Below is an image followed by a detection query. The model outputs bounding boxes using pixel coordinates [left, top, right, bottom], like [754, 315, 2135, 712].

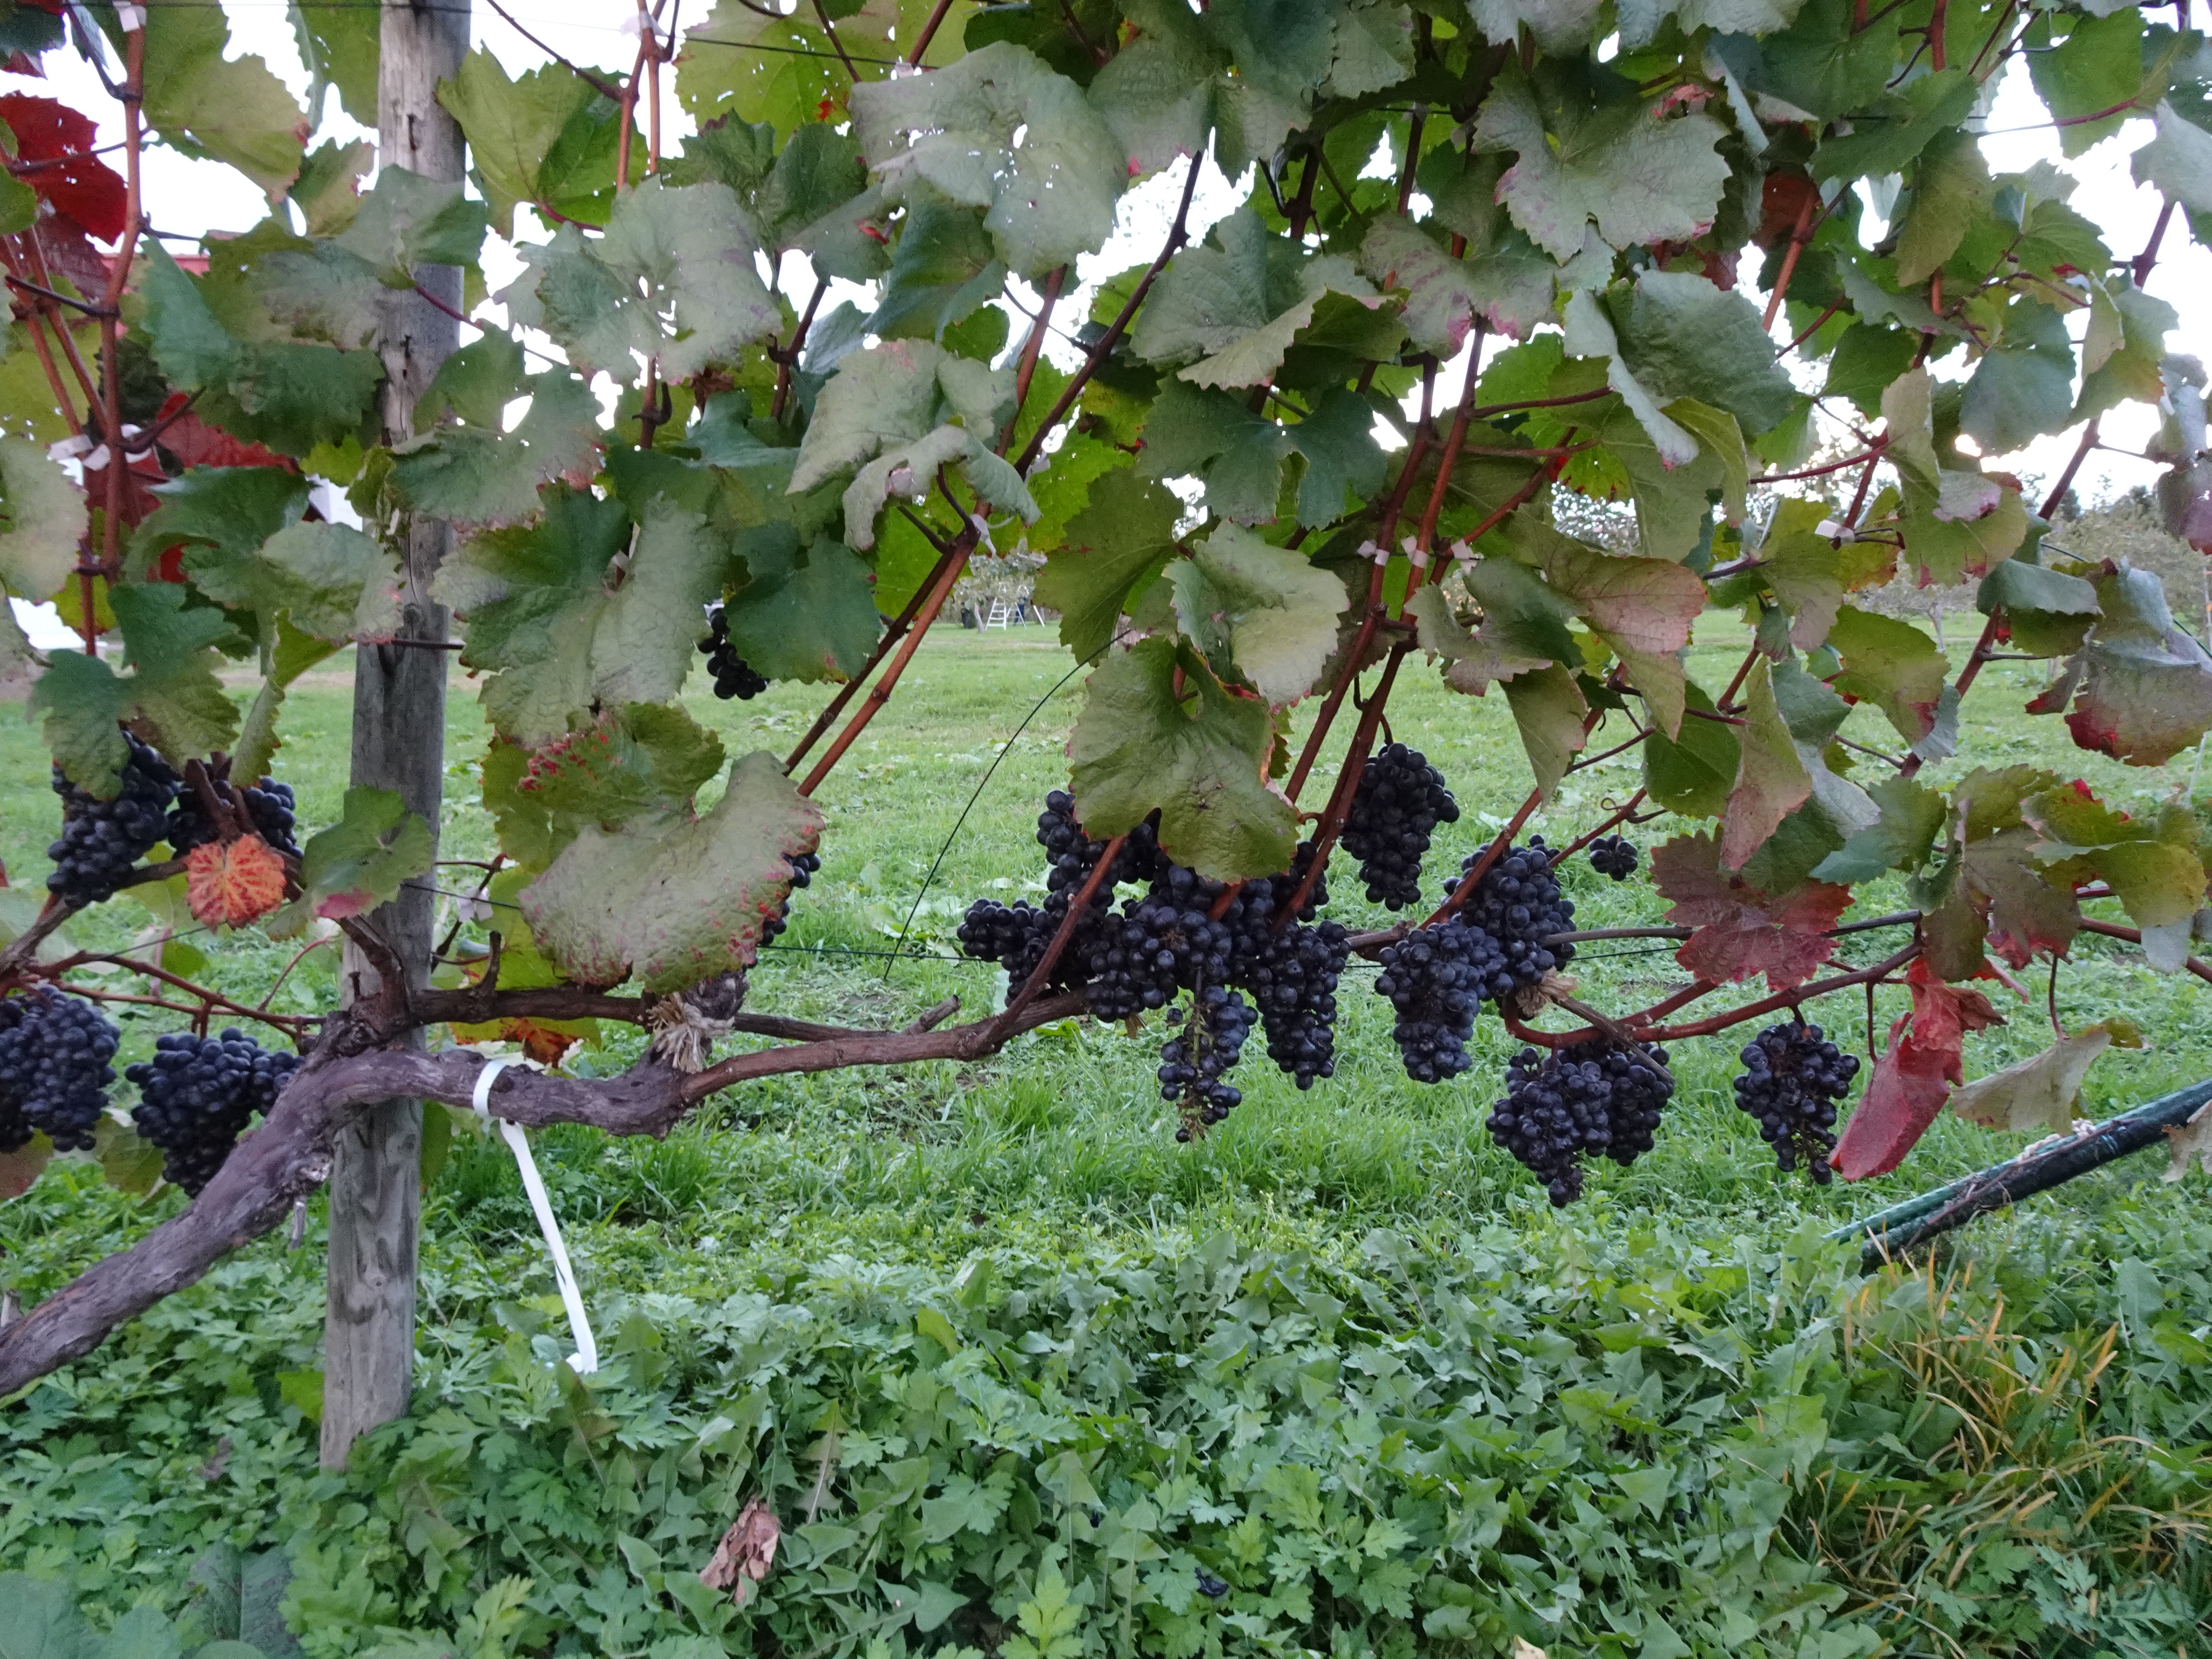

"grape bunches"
[249, 1045, 336, 1138]
[1032, 781, 1116, 927]
[1485, 855, 1580, 1025]
[955, 900, 1104, 1013]
[1231, 914, 1351, 1091]
[1153, 984, 1259, 1146]
[1590, 836, 1637, 880]
[756, 844, 824, 948]
[692, 598, 772, 704]
[1093, 797, 1181, 885]
[1097, 906, 1233, 1026]
[122, 1014, 255, 1206]
[41, 732, 172, 909]
[1486, 1050, 1587, 1210]
[1133, 827, 1269, 955]
[1602, 1036, 1677, 1172]
[1443, 833, 1575, 949]
[1250, 836, 1331, 936]
[1731, 1020, 1862, 1183]
[1514, 1059, 1616, 1169]
[1340, 740, 1459, 914]
[1371, 922, 1493, 1086]
[0, 987, 122, 1156]
[166, 776, 312, 880]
